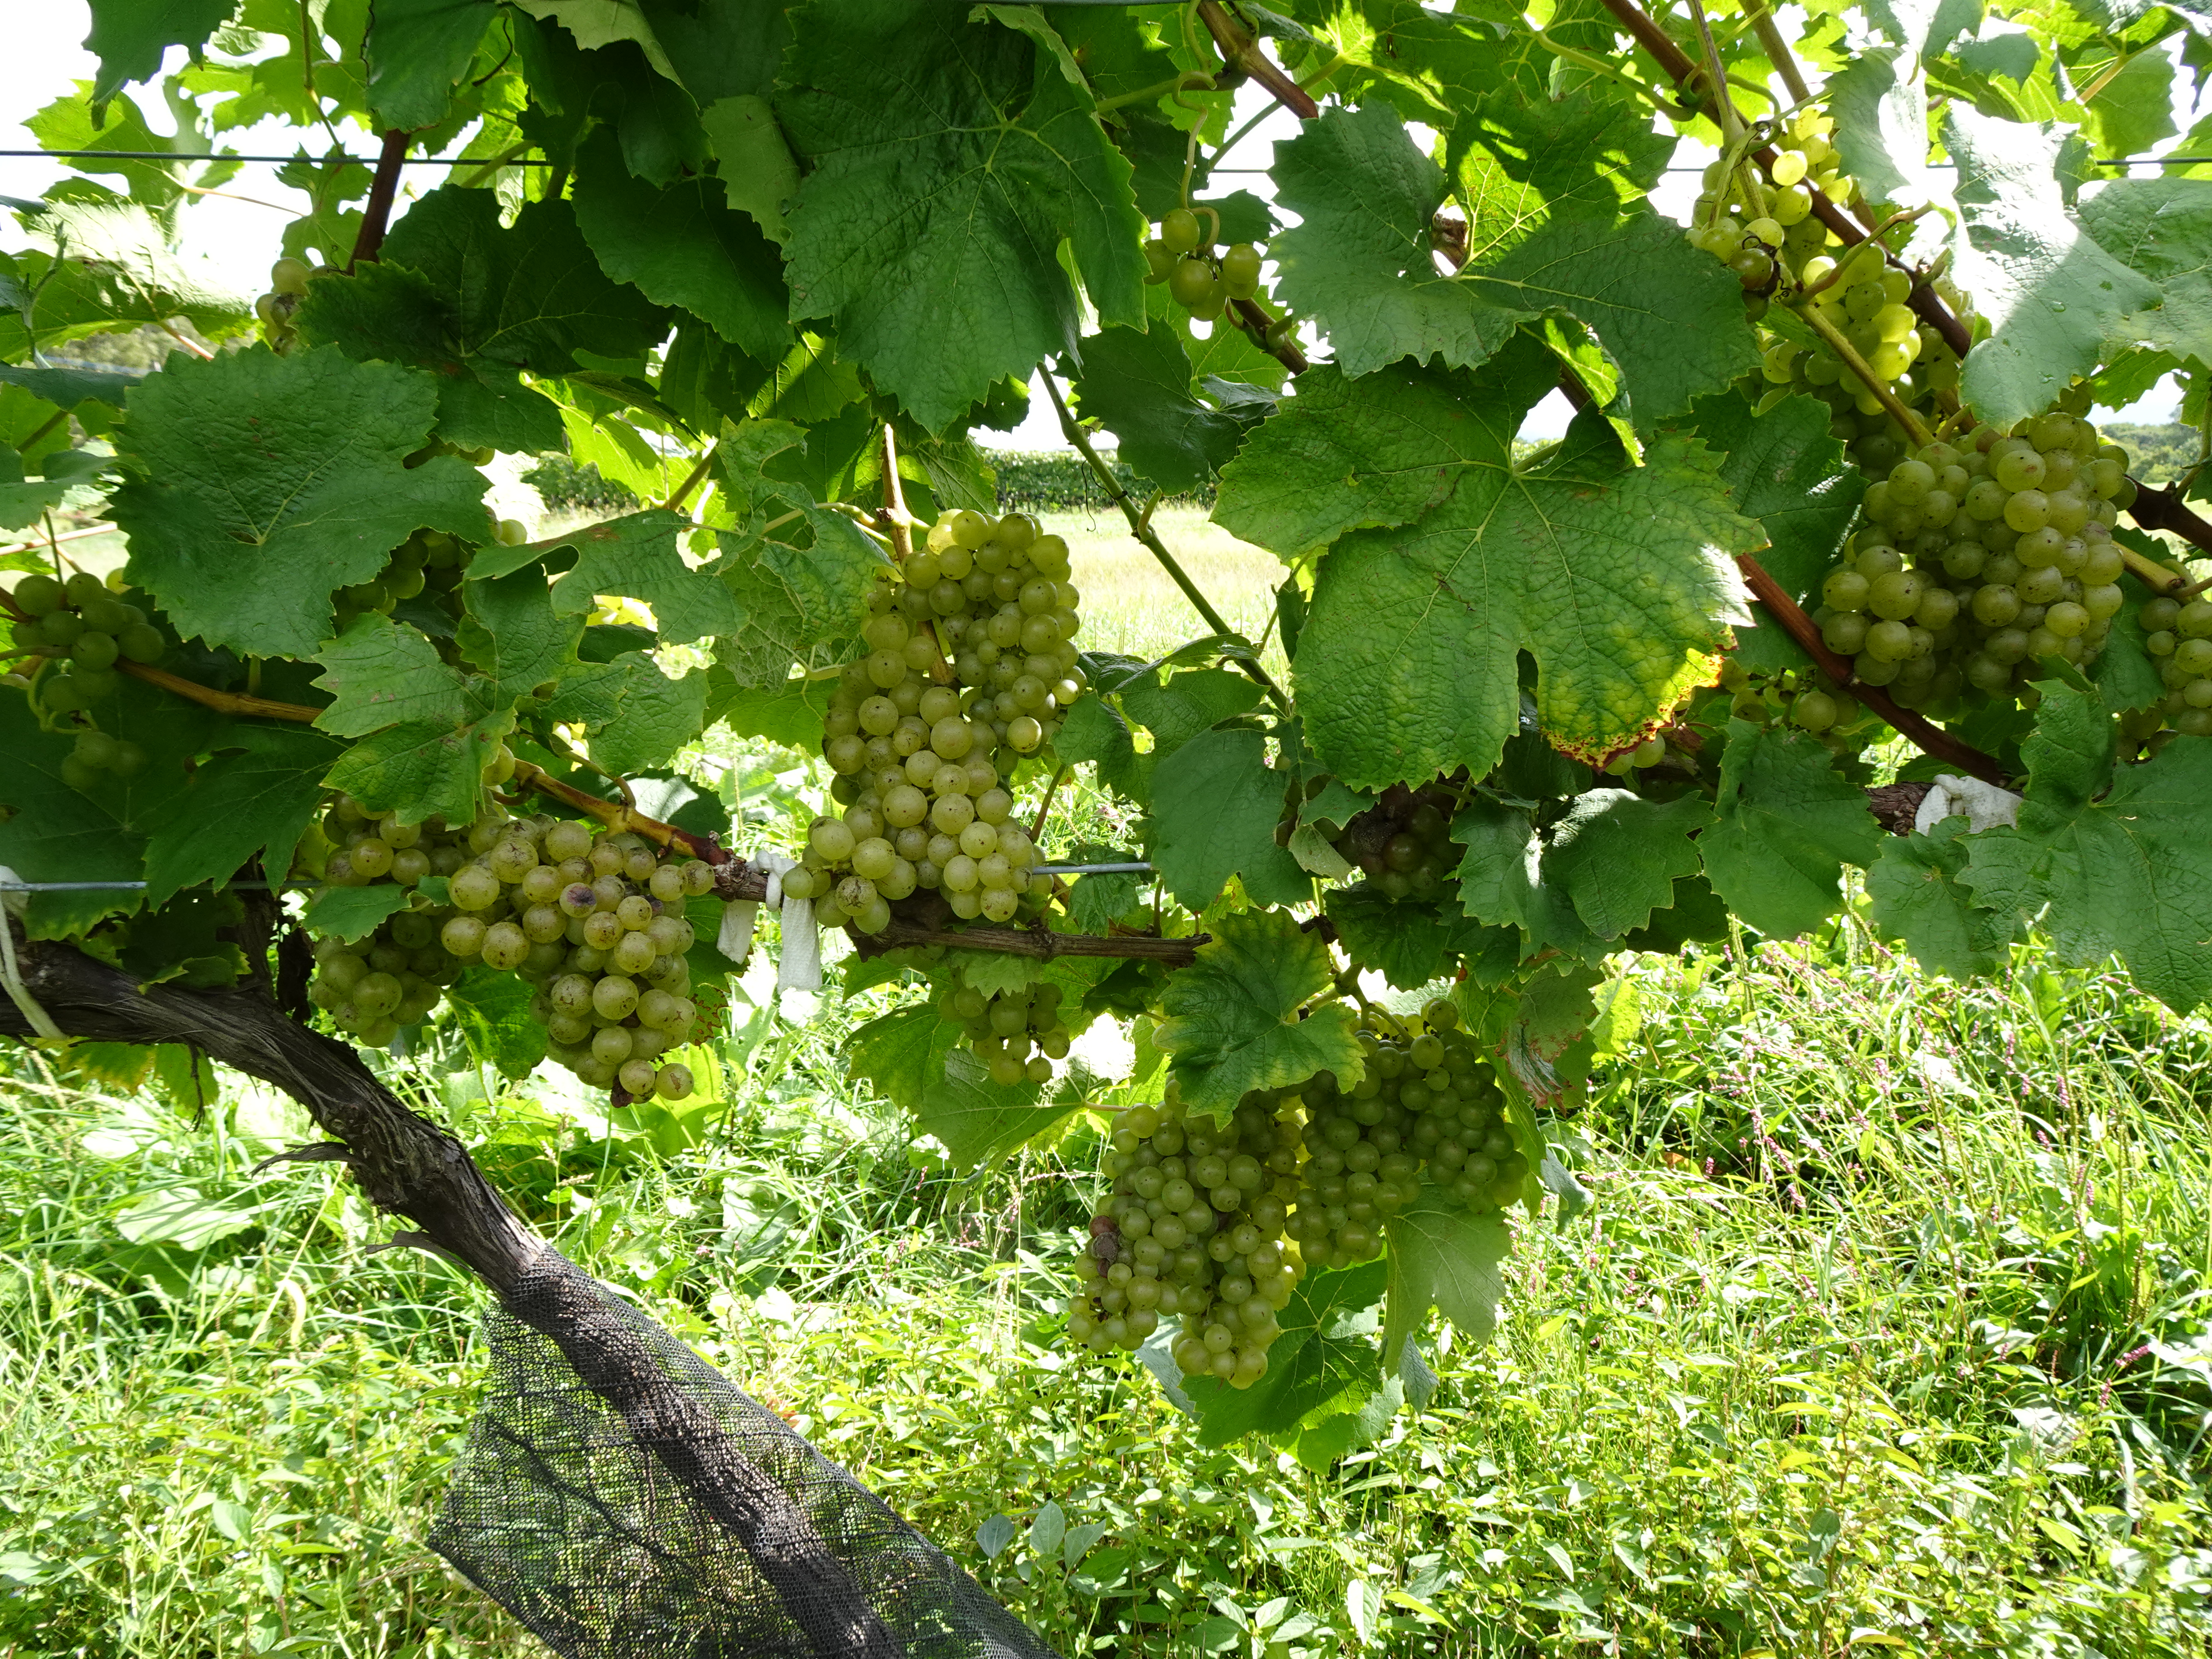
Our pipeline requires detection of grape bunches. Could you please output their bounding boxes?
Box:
[442,812,716,1102]
[1720,656,1858,755]
[1685,103,1854,325]
[2138,598,2212,735]
[311,745,516,1048]
[1142,207,1261,321]
[1171,1194,1305,1389]
[1862,410,2138,710]
[1760,242,1923,413]
[822,581,1054,922]
[1284,1030,1430,1269]
[1603,685,1696,776]
[330,520,526,676]
[894,509,1086,777]
[1275,752,1470,903]
[1790,323,1963,486]
[1809,529,1964,722]
[781,804,917,933]
[11,567,166,791]
[256,258,347,355]
[402,433,495,468]
[1068,1070,1302,1354]
[2112,696,2180,761]
[938,983,1069,1088]
[1356,998,1528,1215]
